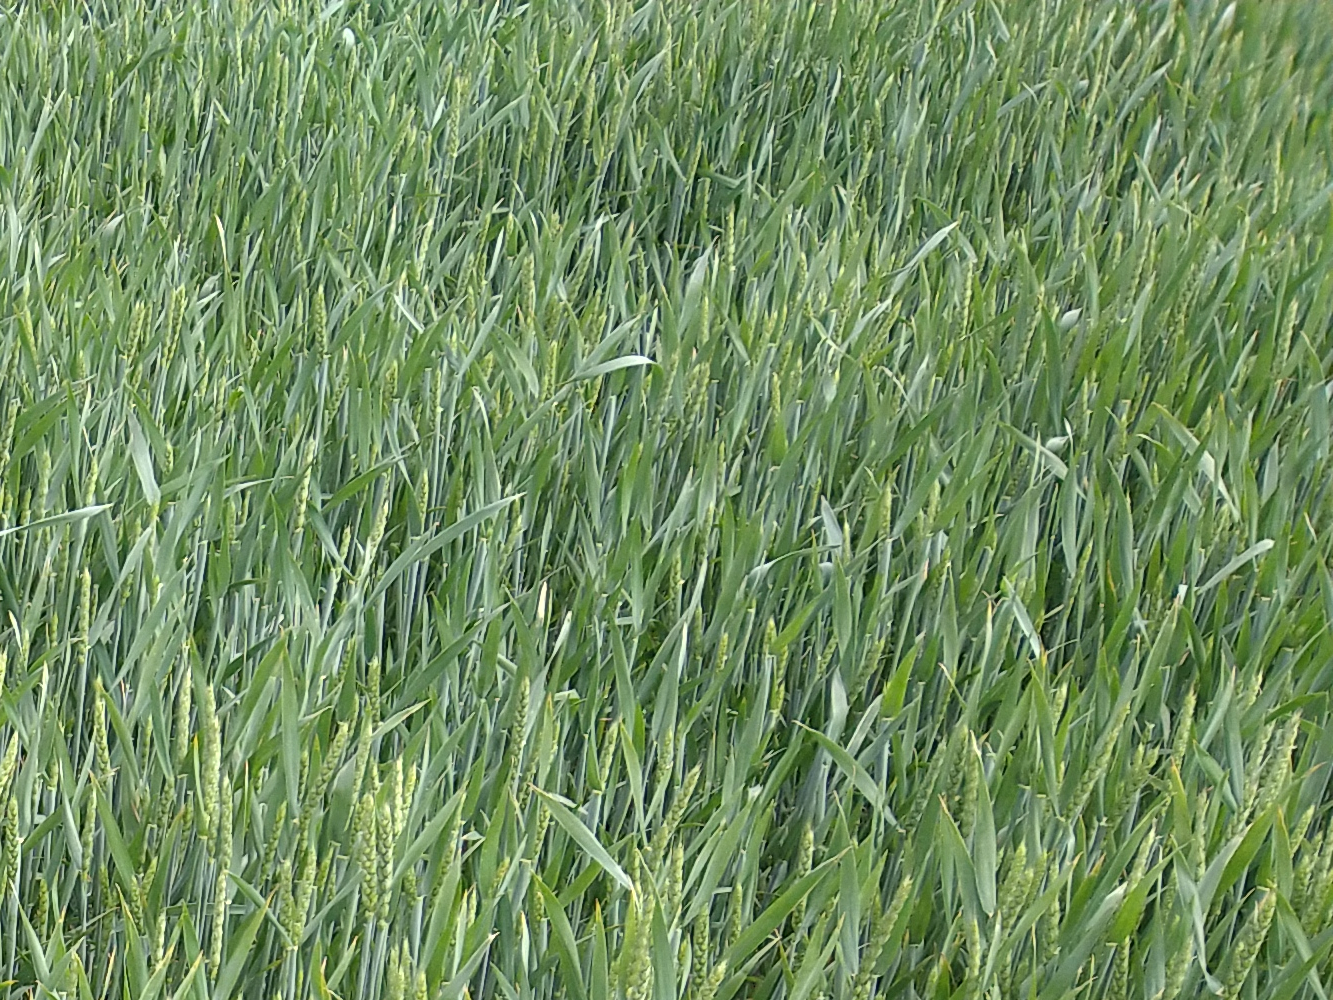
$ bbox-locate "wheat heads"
[277,860,292,944]
[603,605,614,653]
[855,150,873,196]
[280,56,289,122]
[943,729,968,815]
[256,803,286,890]
[695,176,708,218]
[1279,402,1309,451]
[213,379,223,427]
[294,967,302,1000]
[1052,105,1065,144]
[640,374,652,400]
[99,892,118,962]
[905,0,922,62]
[529,90,544,150]
[327,865,336,903]
[215,187,223,212]
[448,924,458,958]
[295,443,313,524]
[680,364,709,416]
[612,957,651,1000]
[66,959,77,1000]
[888,376,904,423]
[128,877,143,934]
[315,291,326,356]
[1110,936,1130,1000]
[959,738,979,842]
[787,249,808,300]
[1311,826,1333,891]
[1258,730,1285,788]
[329,180,338,216]
[137,715,151,774]
[998,948,1013,1000]
[103,71,112,128]
[142,88,151,128]
[0,764,13,825]
[238,151,243,190]
[547,743,559,770]
[580,76,596,136]
[1232,72,1262,149]
[100,864,111,894]
[1137,306,1168,366]
[151,912,166,964]
[764,614,778,655]
[392,756,402,837]
[290,846,317,944]
[295,189,305,227]
[1059,321,1083,359]
[790,356,804,386]
[1273,300,1298,375]
[339,642,352,685]
[657,764,701,844]
[163,285,185,361]
[235,34,241,80]
[325,371,349,422]
[994,578,1036,655]
[640,894,657,949]
[807,291,828,315]
[19,489,32,535]
[7,798,21,893]
[635,247,645,294]
[697,295,711,350]
[265,52,283,121]
[0,735,19,841]
[219,772,231,871]
[606,88,623,155]
[519,728,542,814]
[2,491,12,520]
[717,451,726,495]
[283,181,296,208]
[162,441,171,473]
[291,750,309,808]
[130,361,143,400]
[131,781,149,824]
[927,481,941,532]
[663,963,727,1000]
[122,300,142,357]
[478,353,491,381]
[208,875,224,981]
[657,35,670,93]
[1172,363,1190,403]
[479,247,487,291]
[1063,729,1120,818]
[530,38,540,73]
[1072,23,1088,73]
[957,576,979,610]
[401,962,414,1000]
[999,846,1028,904]
[980,286,997,334]
[374,803,390,921]
[873,11,882,35]
[156,781,171,843]
[414,474,428,511]
[841,229,857,266]
[1166,692,1197,780]
[1092,196,1102,224]
[866,235,879,273]
[1022,871,1044,911]
[1106,752,1159,839]
[535,799,551,866]
[953,258,976,335]
[172,668,190,759]
[1005,617,1026,653]
[54,528,68,590]
[1053,684,1068,733]
[493,856,510,896]
[253,765,264,795]
[1171,241,1216,321]
[344,737,372,806]
[1249,720,1275,764]
[369,657,380,732]
[778,643,789,686]
[850,35,872,92]
[6,335,19,397]
[83,457,98,498]
[13,633,31,681]
[49,613,57,649]
[588,372,603,404]
[402,866,417,914]
[499,500,522,581]
[1036,0,1042,48]
[335,524,352,573]
[874,185,882,211]
[565,250,592,317]
[1139,568,1164,651]
[36,451,49,508]
[949,109,973,186]
[600,723,618,783]
[1114,448,1124,474]
[1090,113,1098,146]
[81,531,94,560]
[1145,231,1157,275]
[547,213,562,253]
[151,62,164,124]
[1299,316,1324,379]
[1287,832,1322,919]
[374,971,404,1000]
[1129,830,1157,894]
[0,401,18,473]
[532,875,544,936]
[667,845,685,913]
[350,802,363,844]
[1299,874,1333,932]
[205,728,224,850]
[183,170,200,248]
[421,218,434,271]
[1043,871,1062,964]
[728,883,742,948]
[410,387,435,449]
[455,459,463,501]
[1216,892,1276,1000]
[1020,114,1039,160]
[1042,300,1059,350]
[458,253,474,290]
[1101,231,1123,282]
[644,824,670,874]
[1259,714,1301,816]
[142,853,157,900]
[427,805,461,913]
[996,846,1005,869]
[180,805,194,855]
[1157,944,1196,1000]
[1007,448,1030,496]
[1083,708,1094,767]
[145,300,152,345]
[1123,220,1152,315]
[657,730,674,783]
[299,726,350,834]
[854,883,913,991]
[632,851,645,934]
[554,96,570,154]
[359,794,384,911]
[692,912,709,999]
[39,882,47,943]
[439,87,460,187]
[523,250,531,323]
[392,121,408,159]
[131,9,142,55]
[640,971,655,1000]
[670,548,682,627]
[653,355,680,417]
[583,287,603,346]
[120,572,134,604]
[372,367,392,403]
[205,684,219,731]
[1067,539,1093,607]
[1004,287,1045,377]
[1217,772,1259,853]
[752,314,777,359]
[1000,131,1016,185]
[94,693,107,792]
[1068,207,1080,282]
[849,638,885,703]
[924,548,951,622]
[1134,734,1147,774]
[1099,117,1112,161]
[771,341,794,374]
[793,829,815,932]
[57,159,66,199]
[694,601,702,644]
[820,635,838,673]
[81,789,96,876]
[514,911,522,940]
[538,292,561,333]
[855,0,877,27]
[76,571,91,663]
[469,886,475,927]
[1093,294,1125,350]
[1066,325,1090,392]
[1291,804,1314,855]
[771,368,780,426]
[876,484,892,552]
[590,315,608,345]
[544,340,558,398]
[573,38,598,97]
[969,926,981,980]
[903,739,944,833]
[405,763,416,812]
[925,967,937,999]
[1187,794,1206,878]
[1000,868,1035,935]
[19,303,33,354]
[862,300,900,364]
[369,500,389,559]
[784,295,798,332]
[509,681,531,790]
[715,618,729,673]
[838,279,855,344]
[726,204,736,267]
[1200,87,1218,132]
[1250,674,1262,709]
[695,502,713,570]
